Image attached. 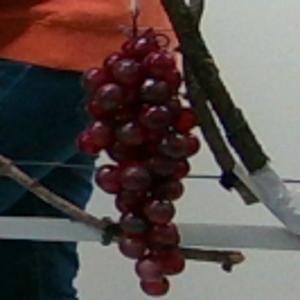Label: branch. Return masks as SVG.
<instances>
[{"label":"branch","instance_id":"30e6481e","mask_svg":"<svg viewBox=\"0 0 300 300\" xmlns=\"http://www.w3.org/2000/svg\"><path fill=\"white\" fill-rule=\"evenodd\" d=\"M159 1H160V7H161V8H162V10H163V11H164V13H165V16H166V18H167V21H168V23H169V26H170V28H171V31H172V33H173V35H174V37H175V38H176V39H177V41H178V45H176V47H174V48H172V51H173V52H174V53H177V54H179V55H180V56H181V69H182V77H183V82H184V84H185V92H183V93H182V91H181V90H179V91H178V94H177V95H176V96H178V97H181V98H182V99H183V101H185V102H186V103H187V104H188V105H191V106H193V107H195V108H196V110H197V111H198V114H199V121H198V124H197V125H196V127H197V128H198V130H199V132H200V134H201V137H202V139H203V141H204V143H205V144H206V146H207V148H208V150H209V153H210V155H211V156H212V158H213V160H214V164H215V165H217V166H218V168H219V169H220V170H221V177H220V178H219V180H218V181H217V184H219V185H220V186H221V187H222V188H223V189H224V190H226V191H227V192H229V193H232V191H233V189H234V190H235V191H236V193H237V195H238V196H239V198H240V200H241V202H242V204H243V206H244V207H247V206H251V205H254V204H255V203H262V204H263V205H264V206H265V207H266V208H267V209H268V211H269V212H270V213H271V214H272V215H273V216H274V217H275V218H276V219H277V220H278V221H279V222H280V223H281V224H282V225H283V226H284V227H285V228H287V229H288V230H289V231H290V232H292V233H293V234H294V235H296V236H299V237H300V197H299V196H298V195H297V194H296V193H295V192H293V190H292V189H291V188H289V187H288V186H287V185H286V184H283V183H282V182H281V181H280V179H281V177H280V176H279V175H277V174H276V172H275V171H274V170H273V168H272V167H271V164H272V159H271V158H270V156H268V155H267V153H266V152H265V150H264V146H263V145H262V144H261V143H260V140H258V139H257V135H256V133H255V132H254V130H253V129H252V128H251V126H250V125H249V122H248V121H247V119H246V118H245V116H244V114H243V110H242V108H240V107H238V106H236V105H235V102H234V100H233V98H232V95H231V94H230V93H229V90H228V89H227V87H226V84H225V82H224V80H223V79H222V76H221V74H220V68H218V66H217V63H216V61H214V57H213V54H212V53H211V51H210V50H209V48H208V47H207V45H206V41H205V39H204V37H203V34H202V30H201V24H202V17H203V13H204V12H205V3H206V0H189V4H187V2H186V0H159ZM212 110H213V111H214V112H215V114H216V116H217V118H218V122H219V124H220V125H221V127H222V128H223V133H222V131H221V128H220V127H219V126H218V124H217V121H216V119H215V117H214V116H213V114H212ZM229 147H230V148H231V149H232V150H233V151H234V154H236V155H237V157H238V159H239V161H240V162H241V164H242V165H243V167H242V166H241V165H239V164H238V163H237V161H236V159H235V157H234V156H233V153H232V151H231V150H230V149H229Z\"/></svg>","mask_w":300,"mask_h":300},{"label":"branch","instance_id":"325d2c04","mask_svg":"<svg viewBox=\"0 0 300 300\" xmlns=\"http://www.w3.org/2000/svg\"><path fill=\"white\" fill-rule=\"evenodd\" d=\"M0 173L7 175L13 181L25 186L35 195L51 203L70 216L71 224H83L100 234V244L104 247L110 246L112 243L119 244L122 236L119 222H115L112 216L102 215L101 218L94 214L84 211L78 206L70 203L66 199L48 191L46 188L38 185V183L25 172L21 171L16 164L0 152Z\"/></svg>","mask_w":300,"mask_h":300},{"label":"branch","instance_id":"170604dd","mask_svg":"<svg viewBox=\"0 0 300 300\" xmlns=\"http://www.w3.org/2000/svg\"><path fill=\"white\" fill-rule=\"evenodd\" d=\"M177 249L183 252L186 260L220 265L221 270L227 274H232L235 266L247 260L242 250L205 249L184 245H179Z\"/></svg>","mask_w":300,"mask_h":300}]
</instances>
